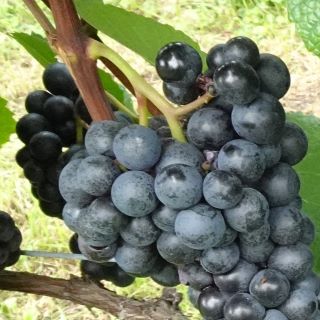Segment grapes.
Wrapping results in <instances>:
<instances>
[{
  "mask_svg": "<svg viewBox=\"0 0 320 320\" xmlns=\"http://www.w3.org/2000/svg\"><path fill=\"white\" fill-rule=\"evenodd\" d=\"M182 41L157 52L167 99L214 97L172 137L165 115L112 105L119 122L97 121L66 64L43 72L45 90L25 98L16 162L47 216L63 219L82 274L128 286L148 277L183 284L206 320H320L312 271L315 223L301 213L293 165L308 151L279 99L290 75L275 54L233 37L207 54Z\"/></svg>",
  "mask_w": 320,
  "mask_h": 320,
  "instance_id": "obj_1",
  "label": "grapes"
},
{
  "mask_svg": "<svg viewBox=\"0 0 320 320\" xmlns=\"http://www.w3.org/2000/svg\"><path fill=\"white\" fill-rule=\"evenodd\" d=\"M21 232L15 227L14 219L0 211V269L9 267L19 260Z\"/></svg>",
  "mask_w": 320,
  "mask_h": 320,
  "instance_id": "obj_2",
  "label": "grapes"
}]
</instances>
